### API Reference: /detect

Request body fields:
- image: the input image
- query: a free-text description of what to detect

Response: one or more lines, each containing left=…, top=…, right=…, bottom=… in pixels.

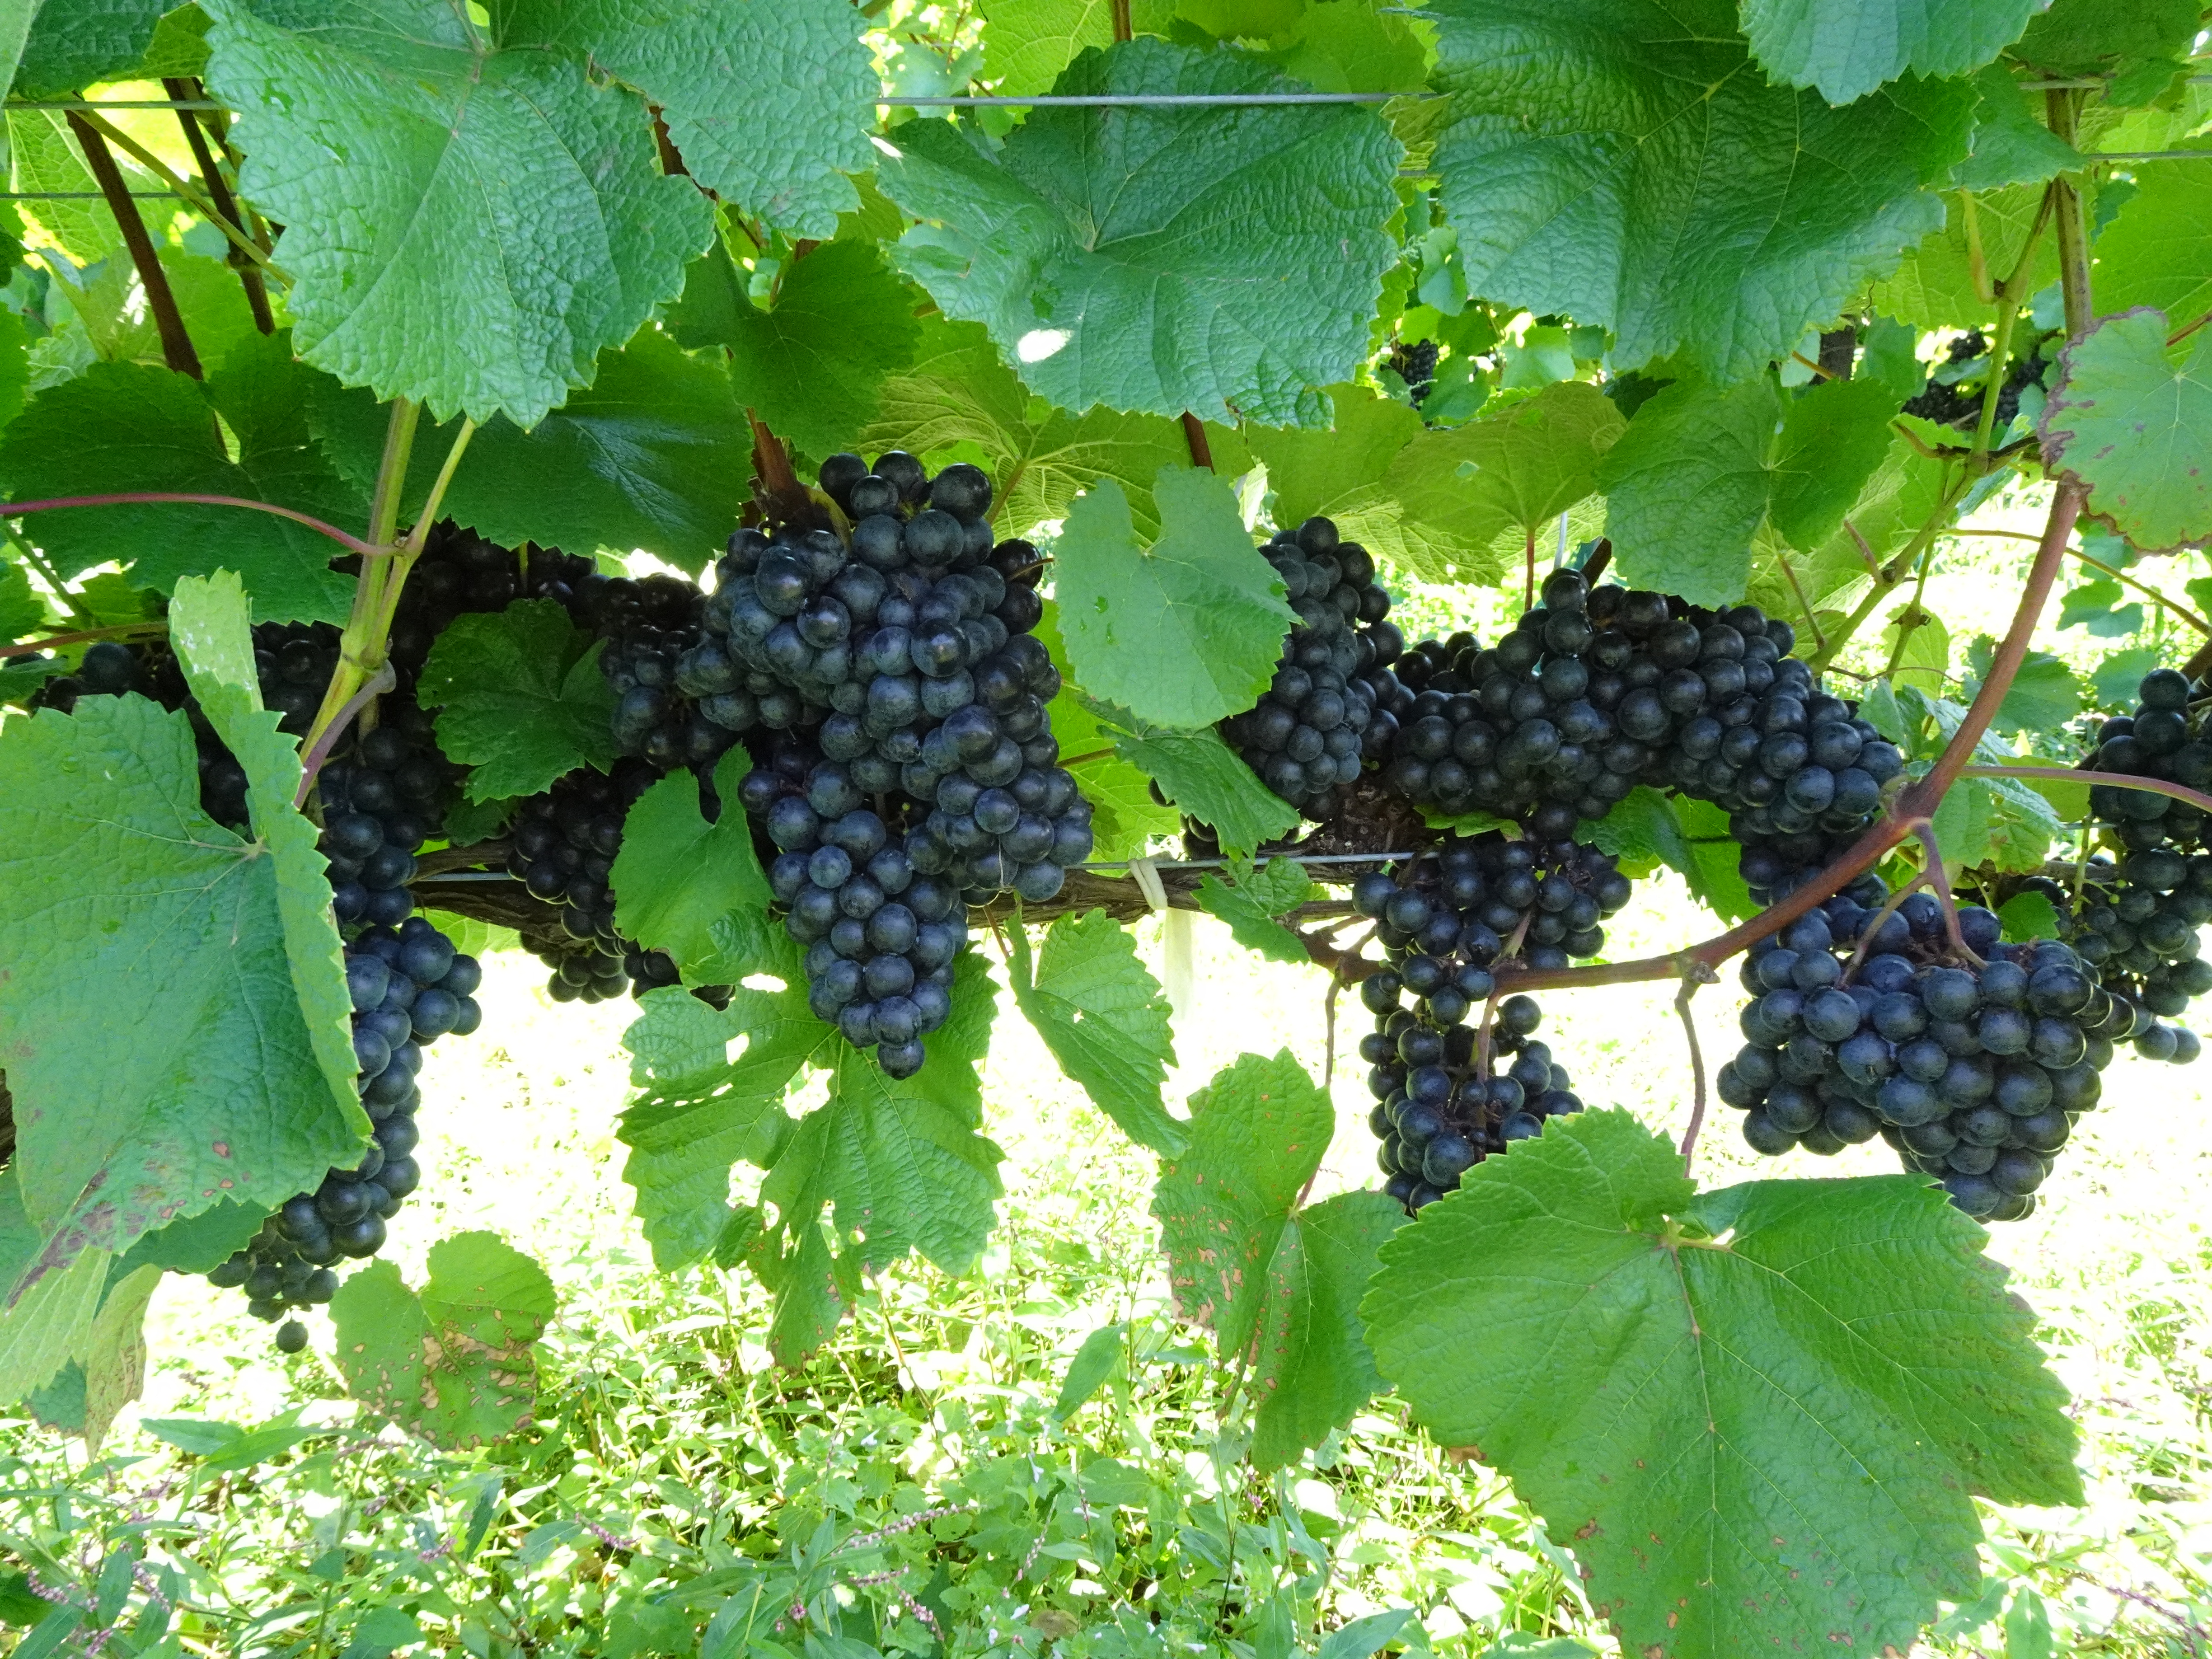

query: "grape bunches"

left=1699, top=603, right=1903, bottom=833
left=613, top=936, right=735, bottom=1011
left=736, top=735, right=967, bottom=1080
left=2019, top=857, right=2212, bottom=1066
left=1856, top=893, right=2134, bottom=1224
left=507, top=758, right=653, bottom=957
left=1531, top=571, right=1746, bottom=846
left=1718, top=896, right=1906, bottom=1154
left=597, top=624, right=735, bottom=797
left=248, top=621, right=343, bottom=755
left=2079, top=668, right=2212, bottom=924
left=0, top=629, right=251, bottom=829
left=351, top=917, right=481, bottom=1047
left=1520, top=837, right=1631, bottom=971
left=308, top=703, right=469, bottom=929
left=520, top=932, right=627, bottom=1003
left=1352, top=842, right=1549, bottom=1026
left=1386, top=603, right=1551, bottom=819
left=1360, top=974, right=1583, bottom=1219
left=1149, top=778, right=1230, bottom=861
left=1273, top=516, right=1404, bottom=761
left=1224, top=544, right=1377, bottom=809
left=676, top=448, right=1091, bottom=908
left=1726, top=811, right=1889, bottom=910
left=166, top=1216, right=276, bottom=1287
left=243, top=1234, right=339, bottom=1352
left=454, top=539, right=597, bottom=615
left=329, top=515, right=463, bottom=723
left=592, top=575, right=712, bottom=643
left=260, top=949, right=419, bottom=1263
